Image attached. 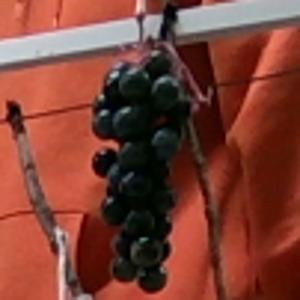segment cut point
<instances>
[{"label":"cut point","instance_id":"6a23745f","mask_svg":"<svg viewBox=\"0 0 300 300\" xmlns=\"http://www.w3.org/2000/svg\"><path fill=\"white\" fill-rule=\"evenodd\" d=\"M133 19L137 25L138 30V60L144 55V34L147 20V0H137L136 9L134 11Z\"/></svg>","mask_w":300,"mask_h":300}]
</instances>
